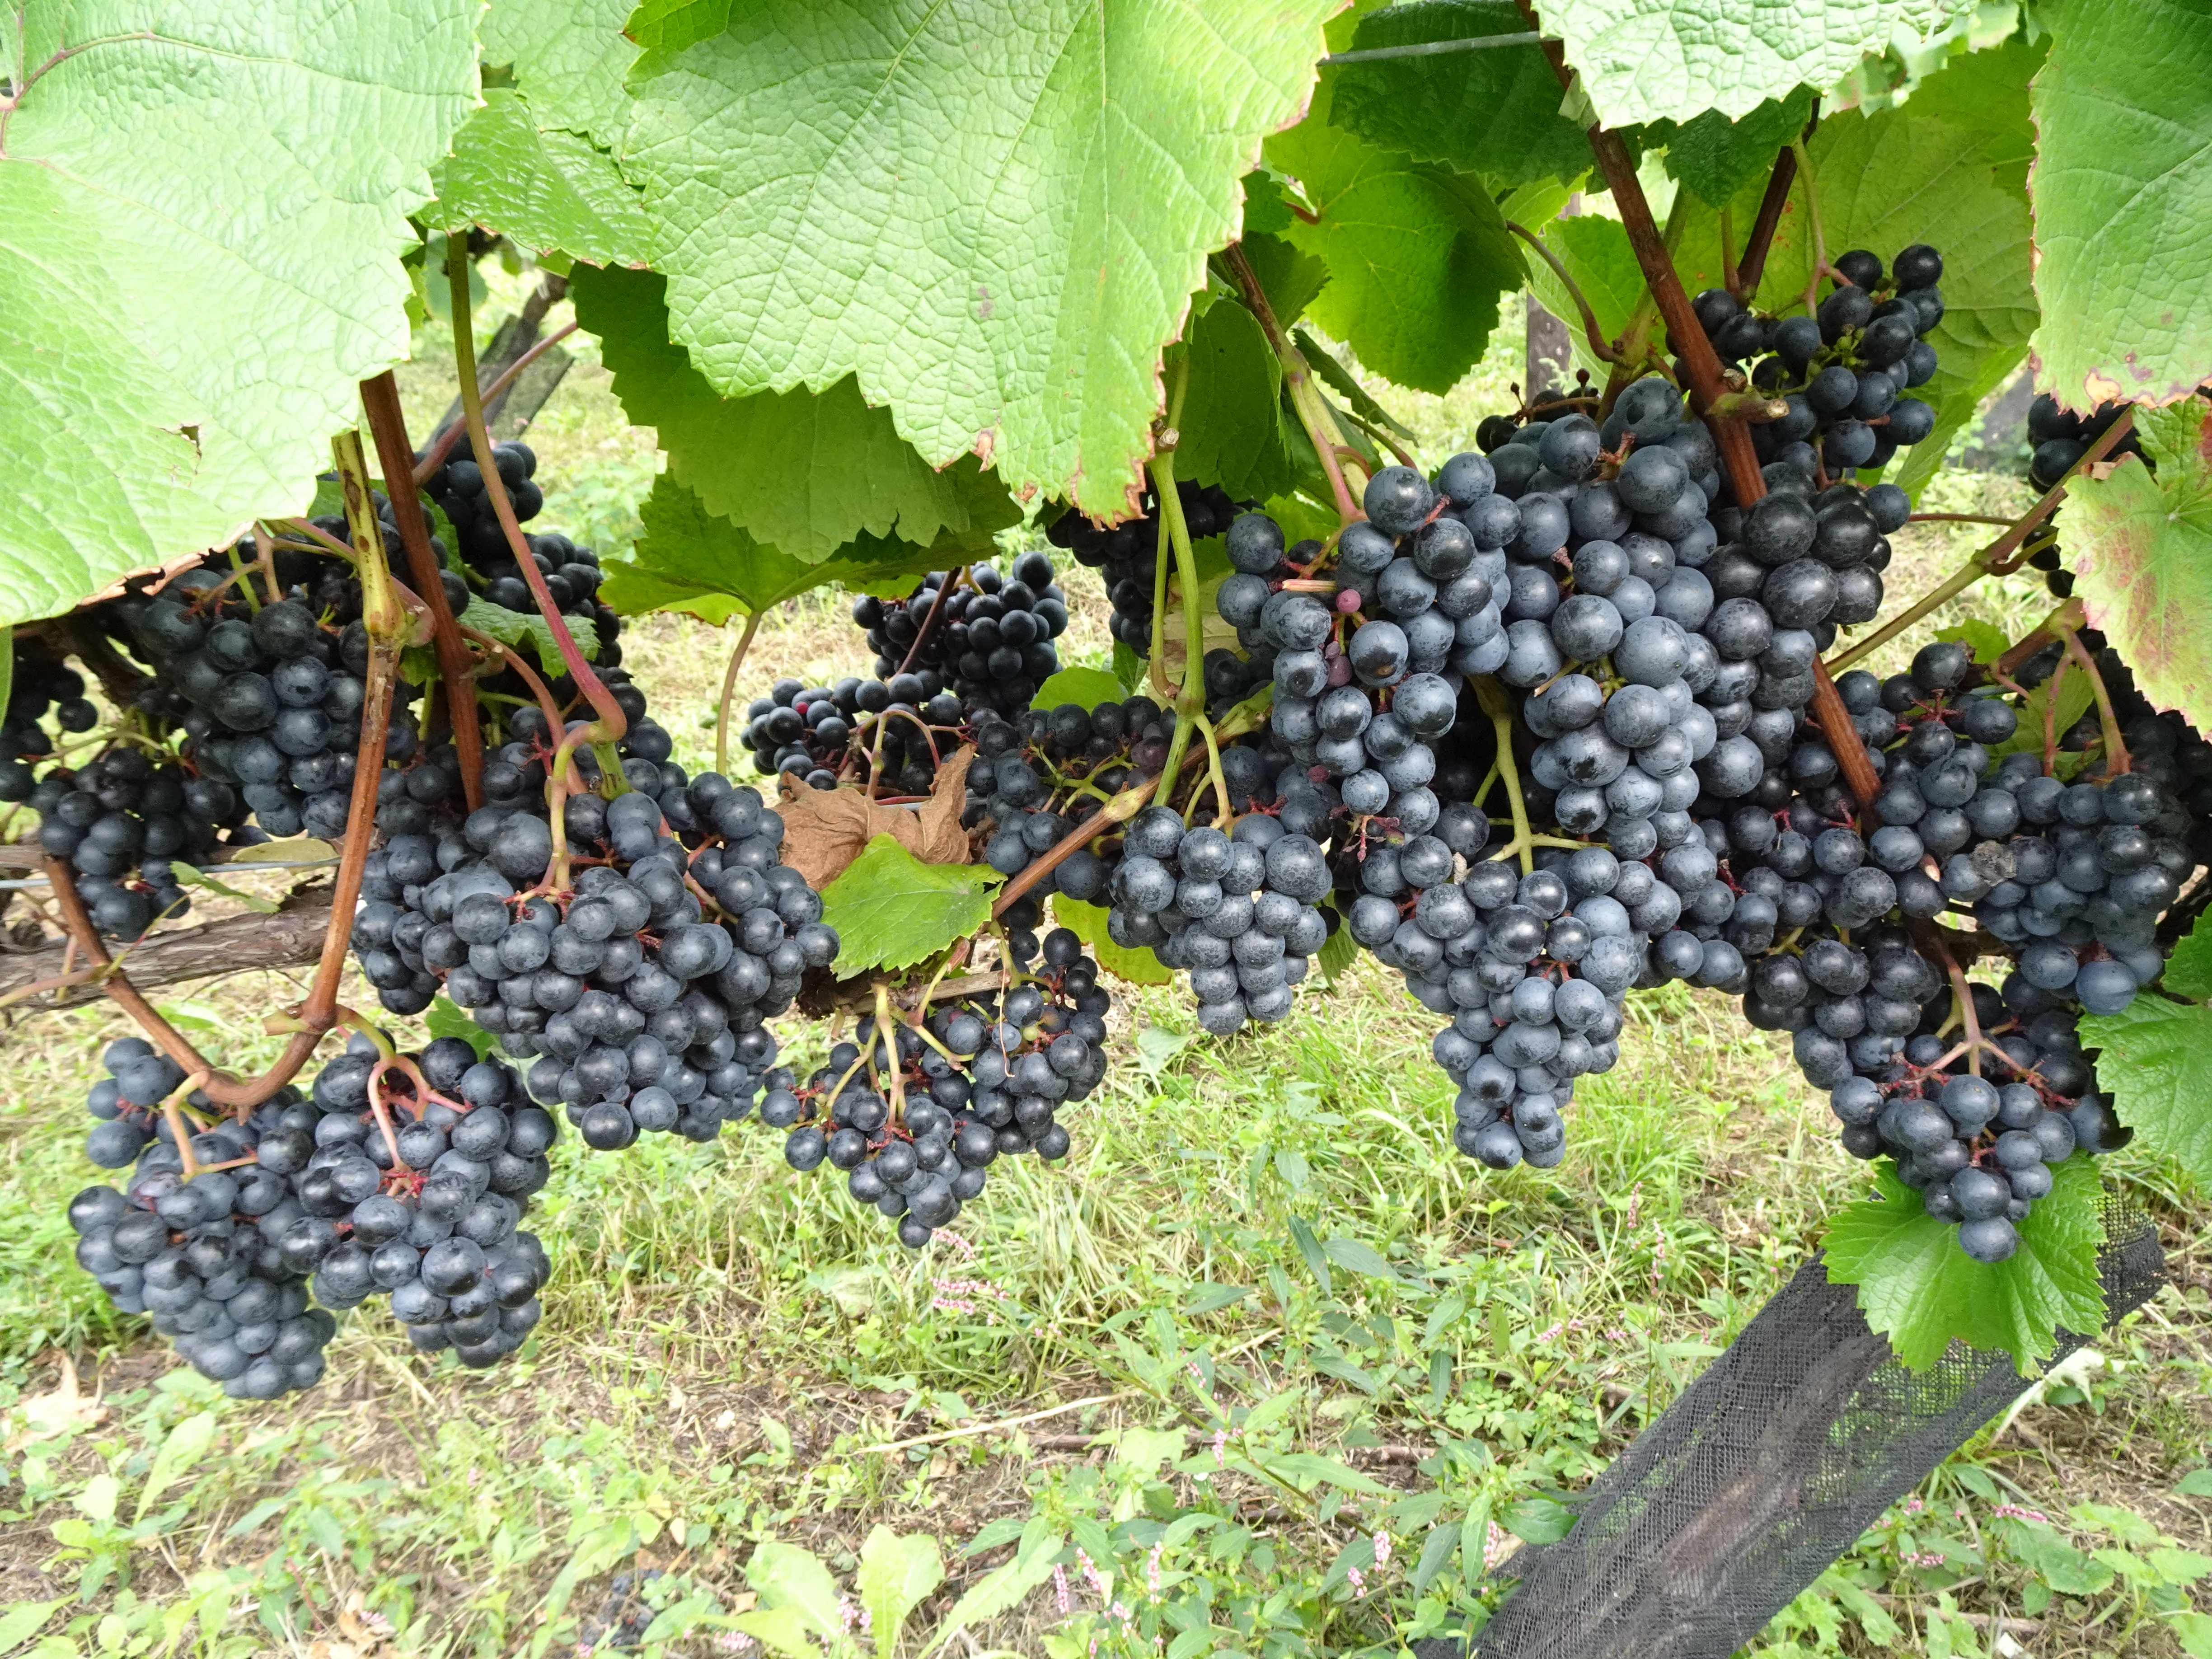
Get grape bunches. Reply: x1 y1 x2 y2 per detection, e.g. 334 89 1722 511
741 672 1007 802
759 1006 998 1247
966 697 1183 901
1831 975 2138 1259
351 724 479 1014
34 736 254 946
305 498 470 619
467 533 644 726
281 1028 558 1367
1216 452 1520 839
413 427 543 548
2027 393 2155 598
1678 461 1910 795
131 567 418 839
1107 746 1332 1033
1470 379 1743 994
1790 647 2017 900
424 687 838 1146
6 635 99 798
971 895 1108 1158
1662 244 1947 467
2023 622 2212 864
1034 479 1268 663
68 1036 335 1398
1733 828 1946 1151
1985 764 2198 1011
1348 800 1638 1166
853 551 1067 726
